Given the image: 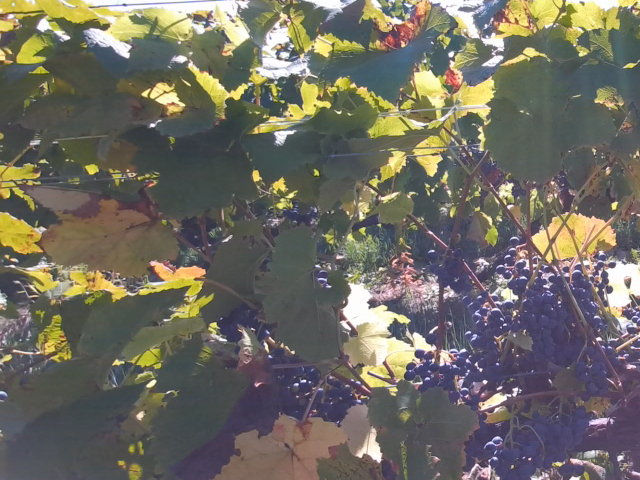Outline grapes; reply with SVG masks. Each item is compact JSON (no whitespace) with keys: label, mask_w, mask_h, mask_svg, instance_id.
<instances>
[{"label":"grapes","mask_w":640,"mask_h":480,"mask_svg":"<svg viewBox=\"0 0 640 480\" xmlns=\"http://www.w3.org/2000/svg\"><path fill=\"white\" fill-rule=\"evenodd\" d=\"M445 267L446 269L438 263H433L430 266V272L441 277L440 285L442 287H450L455 293H470L472 291V286L468 282L467 272L463 270L458 259L447 258Z\"/></svg>","instance_id":"obj_8"},{"label":"grapes","mask_w":640,"mask_h":480,"mask_svg":"<svg viewBox=\"0 0 640 480\" xmlns=\"http://www.w3.org/2000/svg\"><path fill=\"white\" fill-rule=\"evenodd\" d=\"M606 260L607 255L605 253L596 255L594 257L595 265L592 267V273L589 275L590 280L598 289V294L601 300H605L607 298V294H612L614 292V287L612 285H608L610 283L609 273L607 271L601 272V268L604 266V262Z\"/></svg>","instance_id":"obj_9"},{"label":"grapes","mask_w":640,"mask_h":480,"mask_svg":"<svg viewBox=\"0 0 640 480\" xmlns=\"http://www.w3.org/2000/svg\"><path fill=\"white\" fill-rule=\"evenodd\" d=\"M509 245L507 254L503 257V264L496 267V272L503 275L505 279H510L507 282V288L512 290L515 296H521L527 287V281L531 277V273L526 269L528 262L521 260L516 263L517 247L519 246V238L512 236L509 239Z\"/></svg>","instance_id":"obj_7"},{"label":"grapes","mask_w":640,"mask_h":480,"mask_svg":"<svg viewBox=\"0 0 640 480\" xmlns=\"http://www.w3.org/2000/svg\"><path fill=\"white\" fill-rule=\"evenodd\" d=\"M585 353L590 357V367L585 363H577L575 365L576 378L586 385L582 392L581 400L588 402L590 397H604V393L608 392L609 382L606 378L609 376V368L602 355L594 346H587Z\"/></svg>","instance_id":"obj_5"},{"label":"grapes","mask_w":640,"mask_h":480,"mask_svg":"<svg viewBox=\"0 0 640 480\" xmlns=\"http://www.w3.org/2000/svg\"><path fill=\"white\" fill-rule=\"evenodd\" d=\"M592 420L584 406L573 410L571 425L552 422L539 412L532 414V421L525 420V432L516 431L513 436L514 448L499 447L509 431L508 419L499 424L487 423V414L478 415V430L465 441L466 460L462 465L469 472L475 460L491 457L490 466L496 468L499 480H531L535 467L549 469L553 462L565 460V450L574 452L582 443L583 430Z\"/></svg>","instance_id":"obj_2"},{"label":"grapes","mask_w":640,"mask_h":480,"mask_svg":"<svg viewBox=\"0 0 640 480\" xmlns=\"http://www.w3.org/2000/svg\"><path fill=\"white\" fill-rule=\"evenodd\" d=\"M273 374L280 390L281 410L300 419L307 411L311 394L320 381L319 370L312 367H275Z\"/></svg>","instance_id":"obj_3"},{"label":"grapes","mask_w":640,"mask_h":480,"mask_svg":"<svg viewBox=\"0 0 640 480\" xmlns=\"http://www.w3.org/2000/svg\"><path fill=\"white\" fill-rule=\"evenodd\" d=\"M268 358L272 363H300L302 356L300 354H288L286 349L277 348L275 351L268 353Z\"/></svg>","instance_id":"obj_11"},{"label":"grapes","mask_w":640,"mask_h":480,"mask_svg":"<svg viewBox=\"0 0 640 480\" xmlns=\"http://www.w3.org/2000/svg\"><path fill=\"white\" fill-rule=\"evenodd\" d=\"M623 315L627 320L633 323L626 326V332L629 335H635L638 331V328H640V307H625L623 309Z\"/></svg>","instance_id":"obj_12"},{"label":"grapes","mask_w":640,"mask_h":480,"mask_svg":"<svg viewBox=\"0 0 640 480\" xmlns=\"http://www.w3.org/2000/svg\"><path fill=\"white\" fill-rule=\"evenodd\" d=\"M488 293L480 291L475 301L469 295H463L461 302L467 305L469 313L480 329V336L473 331L465 334V339L470 342L472 349L482 348L478 355L470 354L467 349L458 351L456 348L449 350L452 363H445L441 367L432 363L435 358L433 351L425 353L423 348L414 352V357L423 361L420 366L414 363L407 365L405 379L413 381L415 375H420L423 383L418 385L420 392L432 390L434 386L441 387L444 391H450L449 400L456 402L460 399L472 410L479 408L480 396H469L468 387L456 388L454 375L465 374L467 380L483 381L485 377H498L501 367L495 365L499 345L494 337H501L506 332H517L528 329L533 337L534 344L529 353V358L538 364H545L552 359L559 365L570 363L573 355L580 351L582 338L574 326V313L565 300L563 282L558 274L549 273V266L543 265L540 273L532 286L525 293L523 305L526 311L514 315L516 301L509 299L501 303L497 295H492L498 304V309L483 306Z\"/></svg>","instance_id":"obj_1"},{"label":"grapes","mask_w":640,"mask_h":480,"mask_svg":"<svg viewBox=\"0 0 640 480\" xmlns=\"http://www.w3.org/2000/svg\"><path fill=\"white\" fill-rule=\"evenodd\" d=\"M329 388L320 389L317 392L314 403L310 405V411L315 417H320L325 422L341 421L346 418L351 405L358 401V395L352 393L350 386L343 384L335 378L327 380Z\"/></svg>","instance_id":"obj_4"},{"label":"grapes","mask_w":640,"mask_h":480,"mask_svg":"<svg viewBox=\"0 0 640 480\" xmlns=\"http://www.w3.org/2000/svg\"><path fill=\"white\" fill-rule=\"evenodd\" d=\"M621 344L618 339H612L608 344L603 346L605 352L610 356L612 364L620 367L622 364L631 363L634 359H640V339L631 344L628 350L622 349L619 353L615 352V348Z\"/></svg>","instance_id":"obj_10"},{"label":"grapes","mask_w":640,"mask_h":480,"mask_svg":"<svg viewBox=\"0 0 640 480\" xmlns=\"http://www.w3.org/2000/svg\"><path fill=\"white\" fill-rule=\"evenodd\" d=\"M561 270L566 274L565 276L568 280L569 288L573 291L576 301L588 325L590 327H597L599 330H605L607 328V323L599 315L600 310L596 301H593V298L591 297V289L585 283L580 263H576L574 265V271L571 274H568L570 272V267L568 265H563Z\"/></svg>","instance_id":"obj_6"}]
</instances>
